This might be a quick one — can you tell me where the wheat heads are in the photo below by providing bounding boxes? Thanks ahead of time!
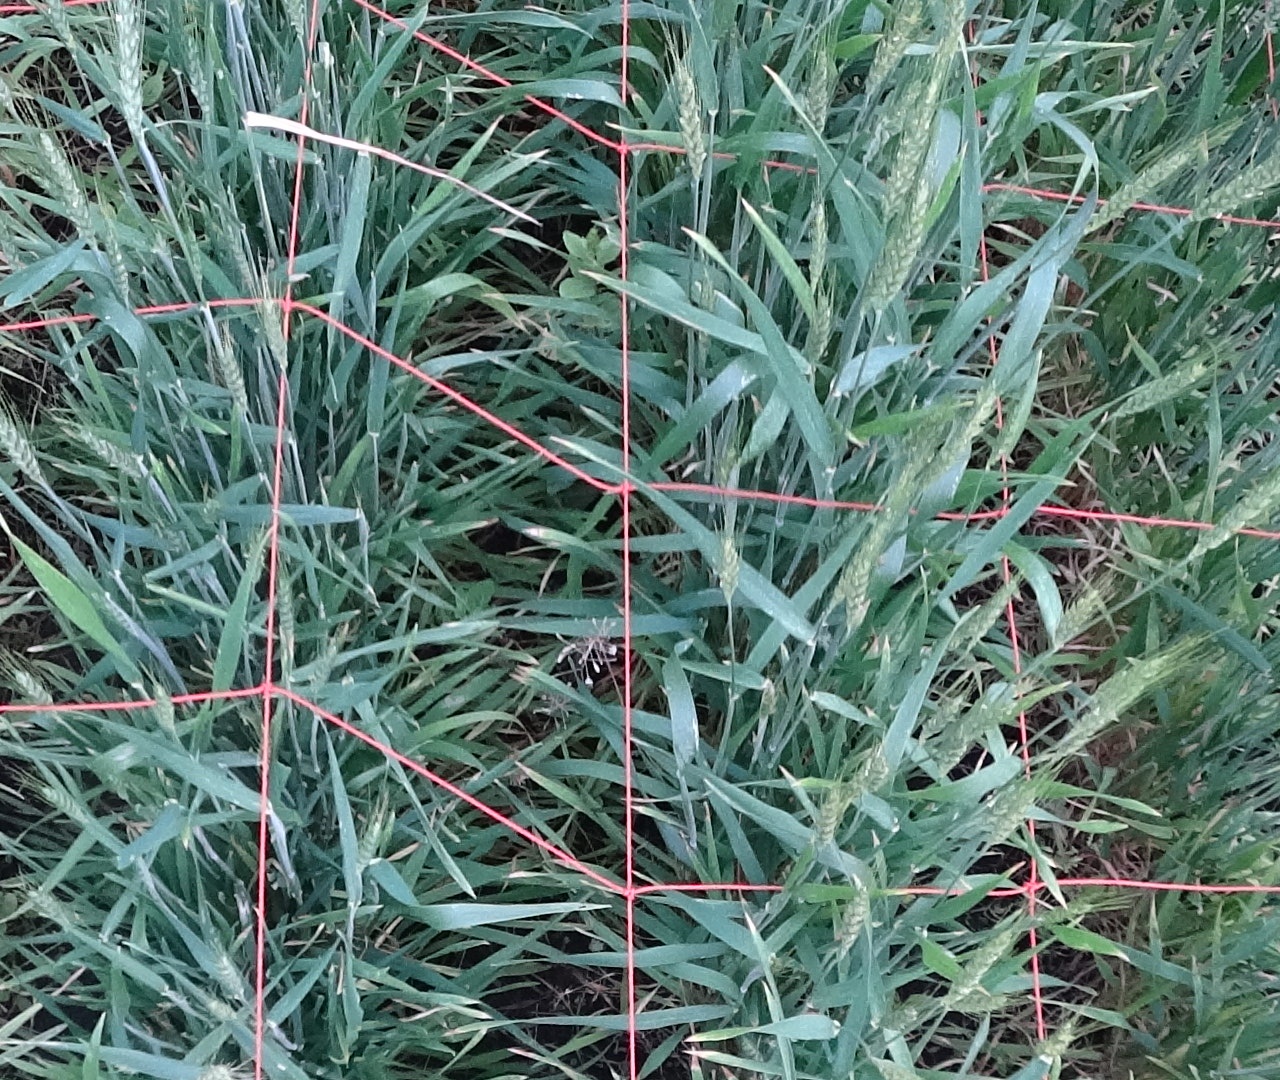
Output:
[978,779,1050,845]
[111,5,146,129]
[177,23,211,117]
[829,513,892,599]
[949,929,1016,1001]
[1074,663,1150,742]
[804,54,825,142]
[874,1005,923,1029]
[674,76,706,177]
[822,785,842,844]
[207,995,239,1022]
[285,1,311,32]
[886,81,943,216]
[12,669,51,714]
[311,647,339,703]
[723,541,739,599]
[949,994,1006,1017]
[230,231,260,289]
[254,285,308,361]
[270,574,299,645]
[870,185,936,304]
[179,220,207,293]
[211,945,249,998]
[706,444,747,497]
[801,296,831,362]
[863,754,888,794]
[1112,358,1204,419]
[42,780,83,826]
[0,414,45,476]
[1057,598,1097,632]
[351,818,389,876]
[906,392,991,492]
[79,432,136,477]
[853,564,868,633]
[867,10,926,94]
[38,133,92,229]
[42,0,81,50]
[967,581,1013,647]
[100,597,139,639]
[208,341,256,407]
[25,884,67,923]
[839,878,869,945]
[757,678,778,714]
[1199,481,1272,558]
[99,229,131,298]
[1084,154,1188,223]
[1191,162,1276,225]
[804,204,832,283]
[948,681,1026,747]
[143,680,181,739]
[1042,1019,1076,1063]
